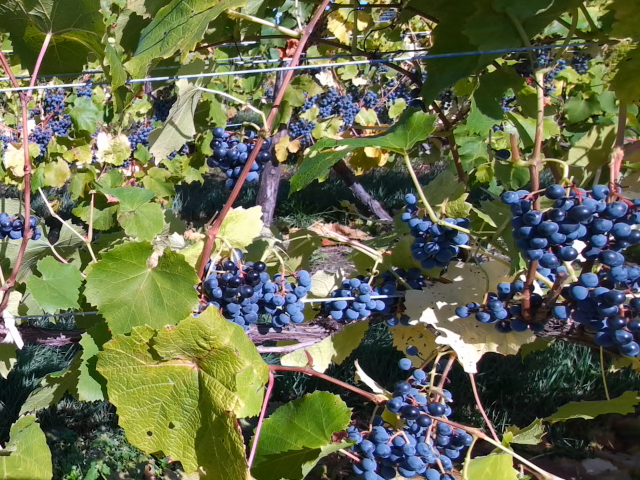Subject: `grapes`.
<instances>
[{
    "label": "grapes",
    "instance_id": "1",
    "mask_svg": "<svg viewBox=\"0 0 640 480\" xmlns=\"http://www.w3.org/2000/svg\"><path fill=\"white\" fill-rule=\"evenodd\" d=\"M566 189L561 184L550 185L545 190L548 199L556 201L553 210L547 213L532 210L531 194L526 189L507 190L502 200L510 206L513 218V236L518 240L525 256L537 261V273L552 283L558 280V273L567 269L561 261H573L578 251L573 247L576 238L587 240L581 249L586 259H597L610 267L597 274L586 272L576 283L562 289L565 299L574 303L575 309L557 304L552 309L558 320L571 317L577 323H585L589 328L599 330L597 342L603 347L618 343L619 350L628 358L640 354V341L634 338L640 333V322L628 323L619 315L620 304L626 299L616 283L626 288L640 287V267L635 263L625 265L622 255L627 246L640 241V232L632 225L640 224V211L614 199H607L610 190L605 185H597L592 190L593 197L582 193L579 204L575 190L566 197Z\"/></svg>",
    "mask_w": 640,
    "mask_h": 480
},
{
    "label": "grapes",
    "instance_id": "2",
    "mask_svg": "<svg viewBox=\"0 0 640 480\" xmlns=\"http://www.w3.org/2000/svg\"><path fill=\"white\" fill-rule=\"evenodd\" d=\"M411 384L408 381H398L391 392V399L387 404L390 413H400L404 418L405 436L395 435V430L384 426V419L376 416L371 426L372 440H365L358 426L347 427L348 438L357 439L351 450L358 452L363 458L361 463H352L354 474L363 475L364 480H391L397 472L406 478L421 475L427 480H455L452 474H442L434 468L428 467L436 462L437 456L430 445L426 444V431L431 424L430 415L451 417L452 408L447 405L453 400V393L448 388L441 390L446 398L444 403L429 402L415 387L430 385V376L421 368L413 371Z\"/></svg>",
    "mask_w": 640,
    "mask_h": 480
},
{
    "label": "grapes",
    "instance_id": "3",
    "mask_svg": "<svg viewBox=\"0 0 640 480\" xmlns=\"http://www.w3.org/2000/svg\"><path fill=\"white\" fill-rule=\"evenodd\" d=\"M234 262L227 260L224 268L228 273L220 275L210 273L206 278V287L216 299L225 300L226 310L233 316L236 325L255 324L258 321L260 301L265 302L264 311L271 316V322L276 328L285 324H301L304 321L303 312L306 305L302 303L304 295L311 290L310 272L307 269L296 268L293 276L298 280V286L293 282L287 283L284 275L286 295L277 294L282 283L271 282L268 265L264 261H248L245 265L251 267L244 280L237 257L233 253Z\"/></svg>",
    "mask_w": 640,
    "mask_h": 480
},
{
    "label": "grapes",
    "instance_id": "4",
    "mask_svg": "<svg viewBox=\"0 0 640 480\" xmlns=\"http://www.w3.org/2000/svg\"><path fill=\"white\" fill-rule=\"evenodd\" d=\"M404 203L405 211L400 214L403 222H409L411 236L415 242L411 245L414 258L422 263L425 270L445 267L451 258L460 253L459 246L469 242V236L447 226H439L431 218L413 217L417 212V195L408 192Z\"/></svg>",
    "mask_w": 640,
    "mask_h": 480
},
{
    "label": "grapes",
    "instance_id": "5",
    "mask_svg": "<svg viewBox=\"0 0 640 480\" xmlns=\"http://www.w3.org/2000/svg\"><path fill=\"white\" fill-rule=\"evenodd\" d=\"M369 278L357 275L355 279H345L341 282L340 289H334L329 293L330 297L354 296L351 302H325L324 308L330 310V316L335 323H340L346 319L356 320L357 318L368 317L372 310L388 313L394 299H371L372 294H395L396 285L385 284L382 287H371Z\"/></svg>",
    "mask_w": 640,
    "mask_h": 480
},
{
    "label": "grapes",
    "instance_id": "6",
    "mask_svg": "<svg viewBox=\"0 0 640 480\" xmlns=\"http://www.w3.org/2000/svg\"><path fill=\"white\" fill-rule=\"evenodd\" d=\"M525 288L524 281H514L511 283H497L495 292L487 294L488 300L485 308L480 309L476 314V319L481 324H495L496 329L501 334H506L512 330L522 332L527 327V322L522 316L521 309L516 304L507 305V299L514 293L522 292Z\"/></svg>",
    "mask_w": 640,
    "mask_h": 480
},
{
    "label": "grapes",
    "instance_id": "7",
    "mask_svg": "<svg viewBox=\"0 0 640 480\" xmlns=\"http://www.w3.org/2000/svg\"><path fill=\"white\" fill-rule=\"evenodd\" d=\"M213 138L210 148L213 150L207 159L209 167H217L226 173V187L231 189L241 173L254 143L242 142L239 138H230V133L223 127L212 129Z\"/></svg>",
    "mask_w": 640,
    "mask_h": 480
},
{
    "label": "grapes",
    "instance_id": "8",
    "mask_svg": "<svg viewBox=\"0 0 640 480\" xmlns=\"http://www.w3.org/2000/svg\"><path fill=\"white\" fill-rule=\"evenodd\" d=\"M437 432L438 444L433 440V431L429 432L430 444L437 454H440L439 459L444 470L450 471L453 467L452 459L460 458L462 451L473 443V436L465 430L439 422Z\"/></svg>",
    "mask_w": 640,
    "mask_h": 480
},
{
    "label": "grapes",
    "instance_id": "9",
    "mask_svg": "<svg viewBox=\"0 0 640 480\" xmlns=\"http://www.w3.org/2000/svg\"><path fill=\"white\" fill-rule=\"evenodd\" d=\"M24 215H8L5 211L0 212V239H22Z\"/></svg>",
    "mask_w": 640,
    "mask_h": 480
},
{
    "label": "grapes",
    "instance_id": "10",
    "mask_svg": "<svg viewBox=\"0 0 640 480\" xmlns=\"http://www.w3.org/2000/svg\"><path fill=\"white\" fill-rule=\"evenodd\" d=\"M272 141L273 137L269 136L262 142V147L260 148V151L258 152V155L254 160L246 177L245 181L247 183H254L259 180V175L264 170L263 163H267L270 160V153L268 152V150L270 149Z\"/></svg>",
    "mask_w": 640,
    "mask_h": 480
},
{
    "label": "grapes",
    "instance_id": "11",
    "mask_svg": "<svg viewBox=\"0 0 640 480\" xmlns=\"http://www.w3.org/2000/svg\"><path fill=\"white\" fill-rule=\"evenodd\" d=\"M481 304L479 302L466 303L465 305L458 306L454 313L460 318H468L471 310L479 309Z\"/></svg>",
    "mask_w": 640,
    "mask_h": 480
},
{
    "label": "grapes",
    "instance_id": "12",
    "mask_svg": "<svg viewBox=\"0 0 640 480\" xmlns=\"http://www.w3.org/2000/svg\"><path fill=\"white\" fill-rule=\"evenodd\" d=\"M39 225V219L36 215L31 216V226H30V235L29 238L33 242H37L41 239V230L37 228Z\"/></svg>",
    "mask_w": 640,
    "mask_h": 480
},
{
    "label": "grapes",
    "instance_id": "13",
    "mask_svg": "<svg viewBox=\"0 0 640 480\" xmlns=\"http://www.w3.org/2000/svg\"><path fill=\"white\" fill-rule=\"evenodd\" d=\"M445 221L447 223H452L453 225H457L463 228H468L471 226V222L470 219L468 217H459V218H452V217H446Z\"/></svg>",
    "mask_w": 640,
    "mask_h": 480
}]
</instances>
